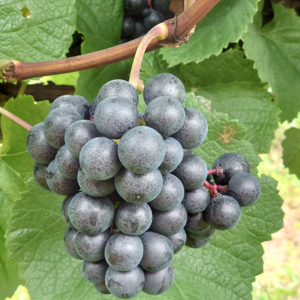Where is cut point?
<instances>
[{"instance_id": "cut-point-1", "label": "cut point", "mask_w": 300, "mask_h": 300, "mask_svg": "<svg viewBox=\"0 0 300 300\" xmlns=\"http://www.w3.org/2000/svg\"><path fill=\"white\" fill-rule=\"evenodd\" d=\"M166 31V27L163 23H159L155 25L152 29H150L142 38L139 47L136 51L135 59L132 65L129 82L137 89V90H143L144 84L143 81L139 79V70L141 61L143 59V54L146 50V47L149 45L151 40L157 36H159L161 33H164Z\"/></svg>"}]
</instances>
